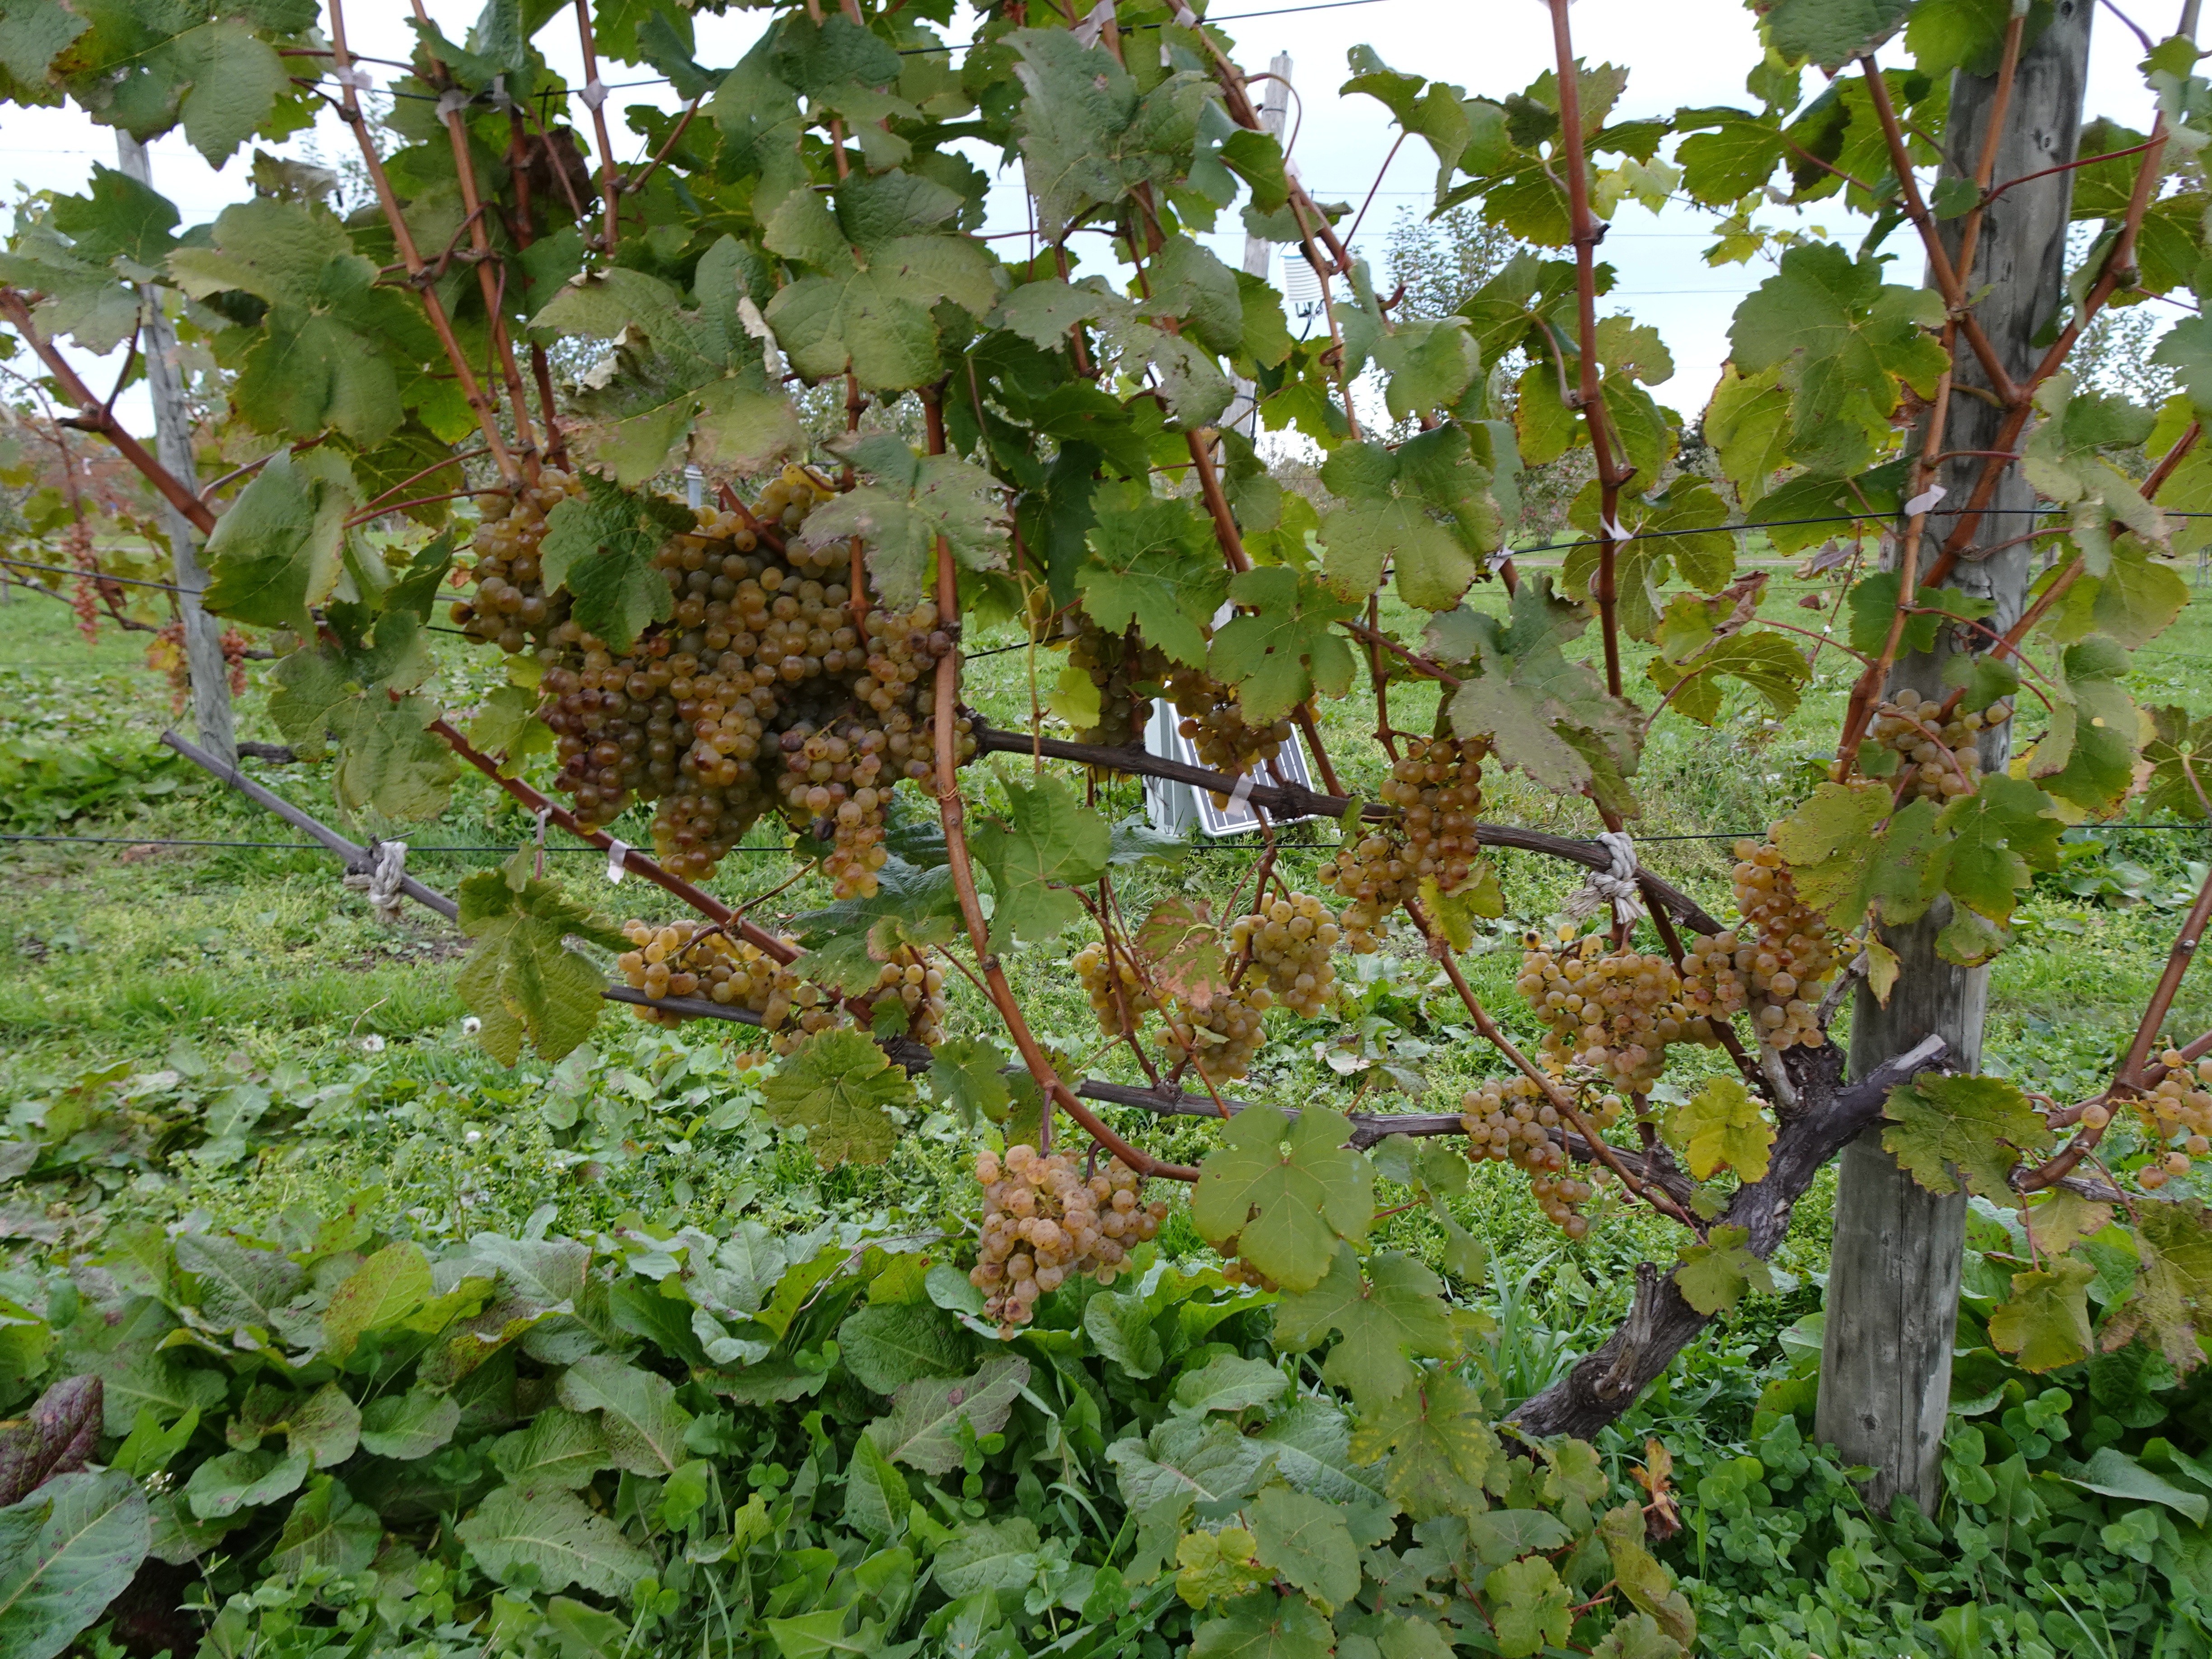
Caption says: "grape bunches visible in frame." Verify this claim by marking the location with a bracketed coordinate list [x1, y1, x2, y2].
[879, 705, 976, 794]
[1193, 990, 1272, 1087]
[1825, 758, 1892, 806]
[1019, 584, 1067, 651]
[1071, 941, 1145, 1040]
[1316, 832, 1435, 952]
[1224, 1259, 1280, 1293]
[1249, 891, 1337, 1020]
[1729, 819, 1789, 924]
[1120, 963, 1174, 1012]
[1735, 976, 1754, 1050]
[778, 721, 898, 899]
[448, 459, 589, 653]
[535, 493, 963, 804]
[867, 922, 946, 1048]
[1380, 737, 1491, 895]
[1231, 915, 1268, 990]
[1188, 1176, 1256, 1261]
[1069, 614, 1212, 783]
[1510, 922, 1612, 1080]
[648, 753, 774, 883]
[750, 461, 835, 531]
[1086, 1154, 1168, 1285]
[1736, 950, 1831, 1051]
[1162, 665, 1290, 809]
[1871, 688, 2011, 806]
[1461, 1073, 1565, 1171]
[1756, 868, 1840, 978]
[737, 986, 838, 1073]
[1549, 1087, 1622, 1133]
[540, 651, 656, 835]
[618, 919, 709, 1030]
[697, 931, 807, 1042]
[1155, 994, 1214, 1063]
[971, 1143, 1104, 1342]
[1817, 936, 1864, 982]
[1679, 931, 1748, 1049]
[1530, 1141, 1619, 1242]
[853, 593, 948, 710]
[2080, 1037, 2210, 1195]
[1582, 953, 1686, 1095]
